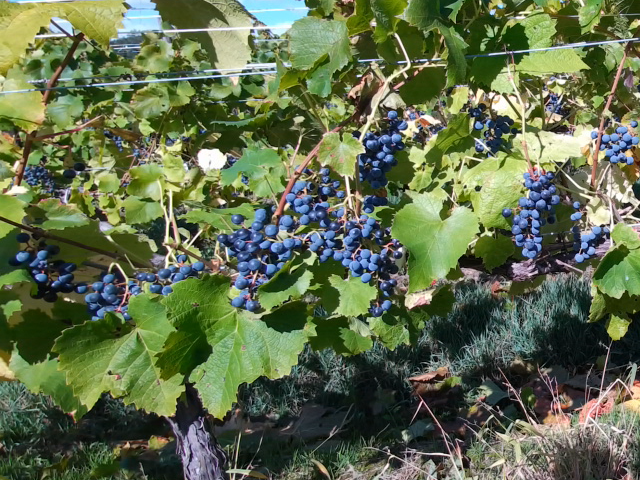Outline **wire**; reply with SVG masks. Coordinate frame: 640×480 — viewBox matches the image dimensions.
Here are the masks:
<instances>
[{"label":"wire","instance_id":"obj_2","mask_svg":"<svg viewBox=\"0 0 640 480\" xmlns=\"http://www.w3.org/2000/svg\"><path fill=\"white\" fill-rule=\"evenodd\" d=\"M640 42V36L629 38L626 40H601L598 42H590V43H573V44H564V45H553L546 47H531V48H522V49H513V50H490L485 52H480L476 54H467L464 56L465 60L469 59H479L492 55H515V54H524V53H533V52H548L555 50H566V49H575V48H592V47H600L604 45H628L632 43Z\"/></svg>","mask_w":640,"mask_h":480},{"label":"wire","instance_id":"obj_3","mask_svg":"<svg viewBox=\"0 0 640 480\" xmlns=\"http://www.w3.org/2000/svg\"><path fill=\"white\" fill-rule=\"evenodd\" d=\"M270 29L289 30L290 26L285 24H267L263 26L248 25H207L196 28H157L149 31H137L129 29H119V34L135 35V36H151L159 33H198L209 30H246V31H265Z\"/></svg>","mask_w":640,"mask_h":480},{"label":"wire","instance_id":"obj_1","mask_svg":"<svg viewBox=\"0 0 640 480\" xmlns=\"http://www.w3.org/2000/svg\"><path fill=\"white\" fill-rule=\"evenodd\" d=\"M276 65H264L253 67H215L210 69H189L179 71H144V72H131L128 74H109V75H81L74 77H59V82H76L84 80H111V79H130L133 77H146V76H181L192 75L185 78H155L144 79L138 81H124V82H101L92 83L80 86H58L48 88H36V89H18V90H0V95H20V94H38V93H50L60 91H82L94 88L103 87H126V86H140L146 84L157 83H188L200 79H231V78H252L269 76L277 73Z\"/></svg>","mask_w":640,"mask_h":480}]
</instances>
